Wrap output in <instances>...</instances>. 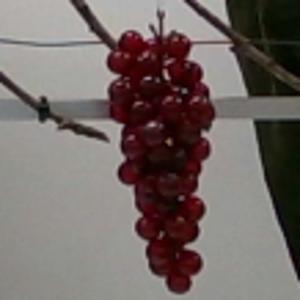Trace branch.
<instances>
[{"label": "branch", "mask_w": 300, "mask_h": 300, "mask_svg": "<svg viewBox=\"0 0 300 300\" xmlns=\"http://www.w3.org/2000/svg\"><path fill=\"white\" fill-rule=\"evenodd\" d=\"M185 3L197 17L203 18L208 24L213 26L219 33L227 37L234 48L240 53H244L253 61L260 63L265 69L279 77L293 87L300 89V78L294 73L286 69L283 65L276 62L262 50L258 49L252 43L247 41L244 37L235 34L229 27H227L212 11L201 4L198 0H181Z\"/></svg>", "instance_id": "obj_1"}, {"label": "branch", "mask_w": 300, "mask_h": 300, "mask_svg": "<svg viewBox=\"0 0 300 300\" xmlns=\"http://www.w3.org/2000/svg\"><path fill=\"white\" fill-rule=\"evenodd\" d=\"M0 84L9 90L23 106L33 112H36L38 114V121L41 124H45L47 120L51 119L53 122L58 124L57 129L59 131H71L75 136H82L84 138L102 141L105 144H109L111 142V139L106 133L91 126L80 124L76 121H71L70 119H65L60 114L54 112L50 108L49 99L46 95H42L40 100L29 95L25 90L17 85L13 79L5 76L2 71H0Z\"/></svg>", "instance_id": "obj_2"}, {"label": "branch", "mask_w": 300, "mask_h": 300, "mask_svg": "<svg viewBox=\"0 0 300 300\" xmlns=\"http://www.w3.org/2000/svg\"><path fill=\"white\" fill-rule=\"evenodd\" d=\"M66 3L70 5L84 21L90 33L95 35L98 39L105 41L108 50H112L117 45V40L106 30L84 0H66Z\"/></svg>", "instance_id": "obj_3"}]
</instances>
